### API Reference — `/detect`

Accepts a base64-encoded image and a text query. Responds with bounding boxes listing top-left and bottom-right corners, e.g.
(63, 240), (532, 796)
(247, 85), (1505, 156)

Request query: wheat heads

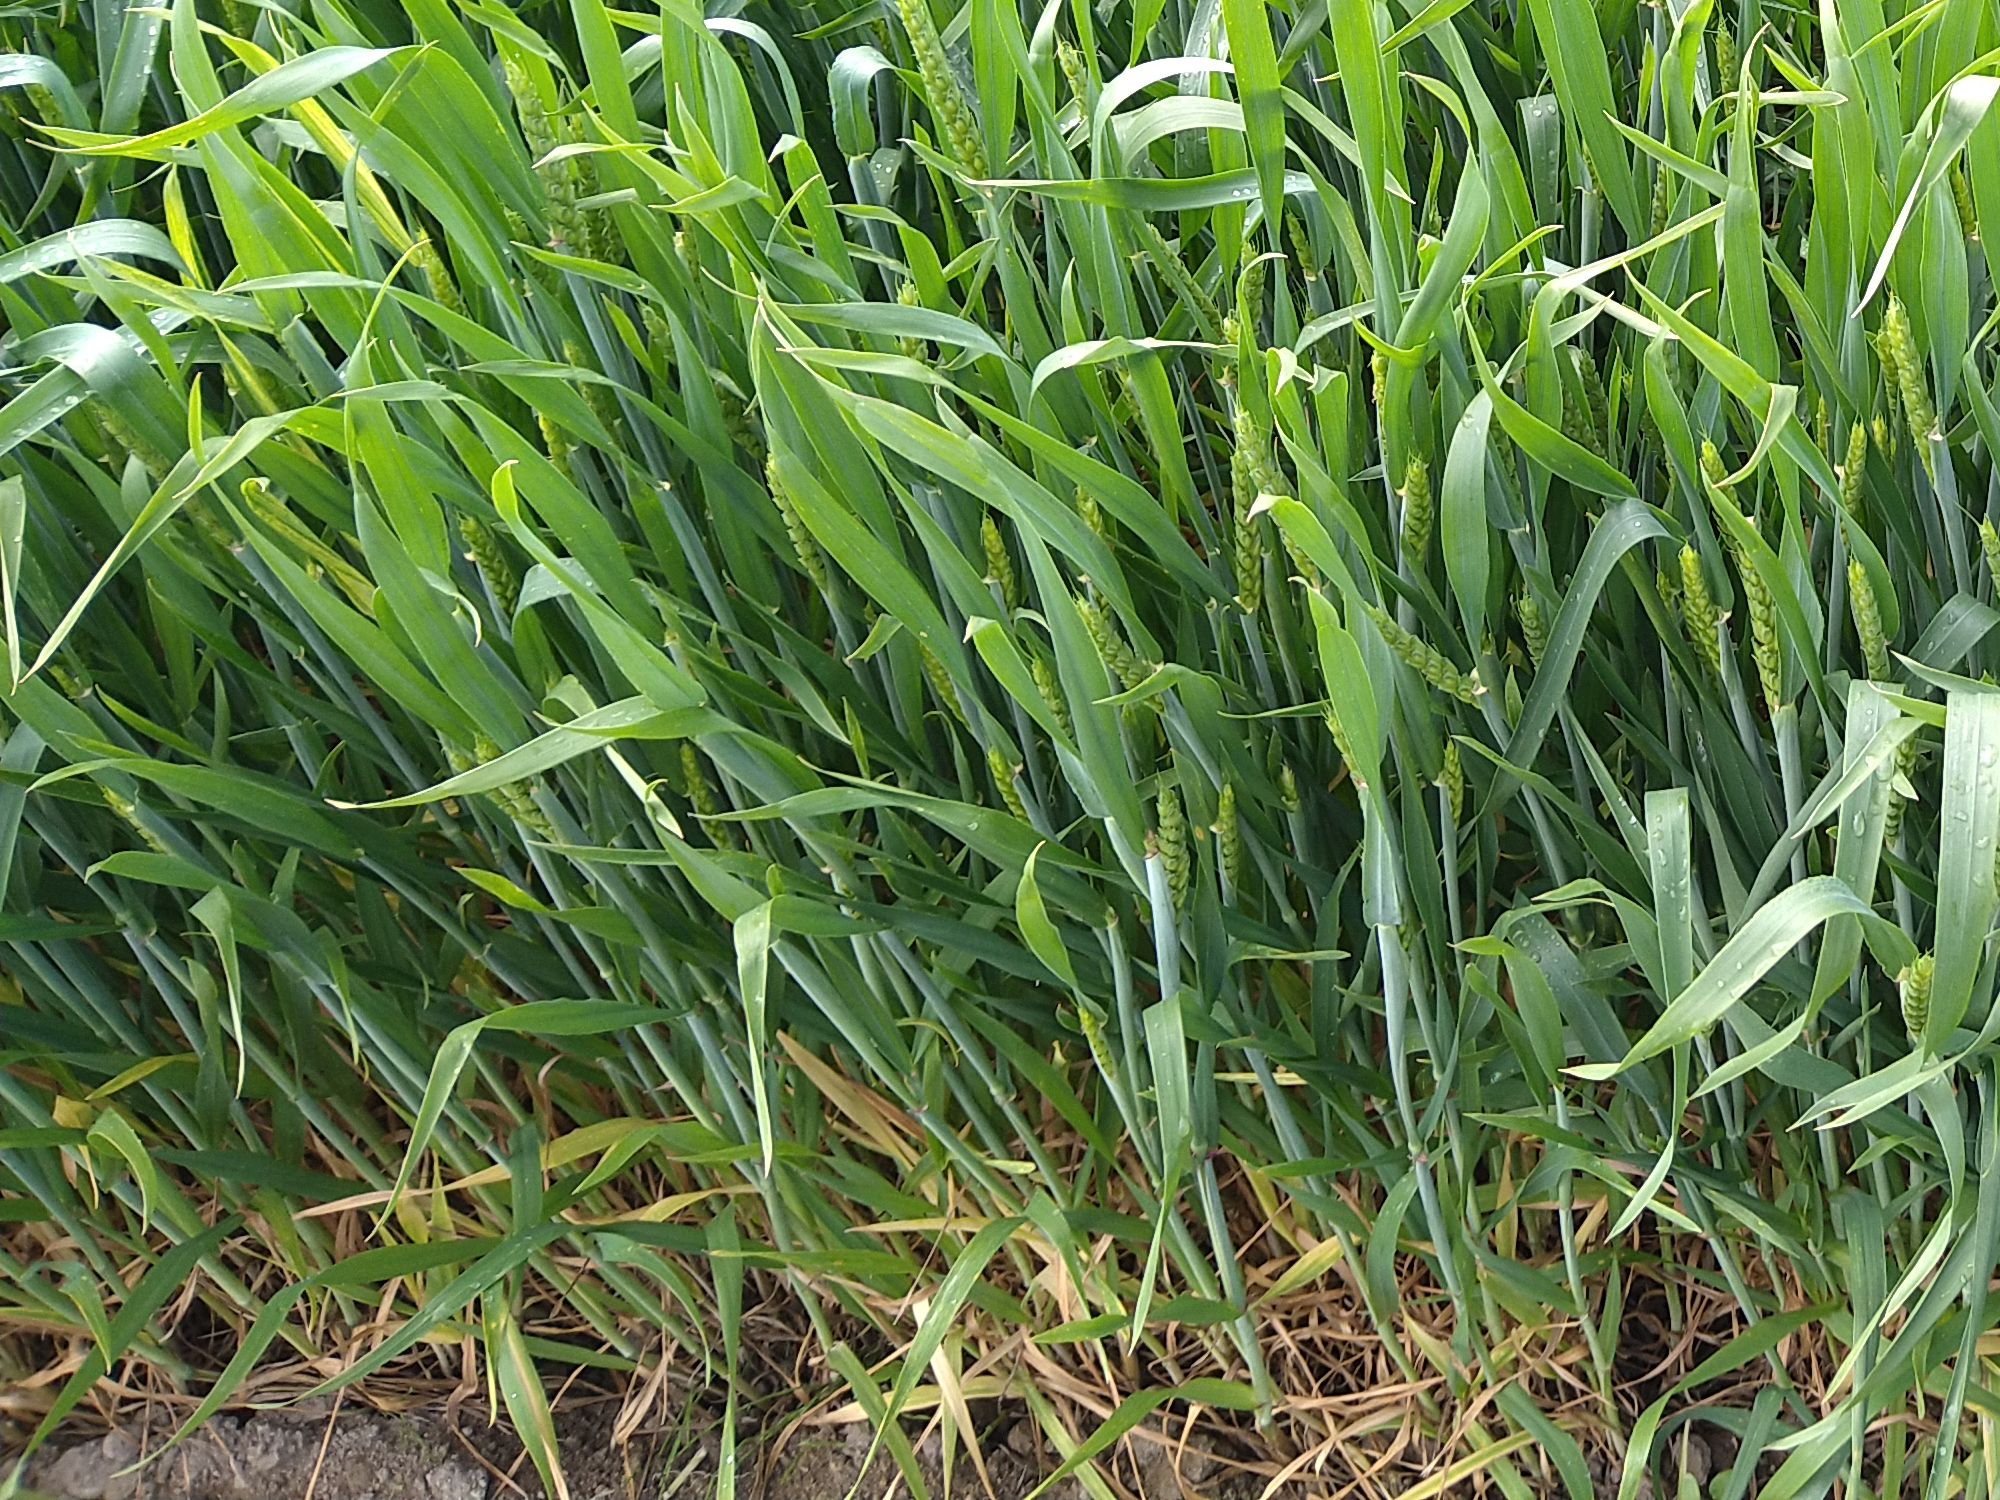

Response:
(1649, 149), (1670, 235)
(1586, 150), (1598, 194)
(988, 743), (1029, 823)
(22, 80), (70, 140)
(473, 732), (554, 842)
(1815, 398), (1828, 459)
(682, 745), (736, 852)
(766, 459), (822, 587)
(102, 788), (169, 855)
(1216, 779), (1239, 891)
(1368, 605), (1476, 708)
(1878, 333), (1898, 426)
(1321, 703), (1357, 812)
(895, 282), (925, 361)
(1490, 402), (1524, 514)
(1232, 396), (1296, 499)
(1083, 574), (1116, 627)
(708, 373), (773, 462)
(1839, 423), (1867, 538)
(221, 0), (246, 39)
(1519, 593), (1547, 667)
(582, 177), (627, 263)
(1900, 950), (1934, 1029)
(1883, 297), (1934, 486)
(460, 517), (517, 622)
(1373, 356), (1385, 456)
(1715, 24), (1743, 131)
(1233, 451), (1261, 614)
(1113, 358), (1144, 441)
(1654, 564), (1672, 626)
(1883, 737), (1913, 832)
(1399, 456), (1428, 571)
(1288, 210), (1315, 274)
(1153, 775), (1189, 901)
(1977, 520), (2000, 676)
(505, 210), (548, 283)
(672, 227), (699, 283)
(1873, 417), (1885, 457)
(1147, 221), (1221, 332)
(1280, 764), (1293, 799)
(1076, 598), (1161, 705)
(1035, 655), (1077, 750)
(1581, 352), (1609, 439)
(638, 301), (679, 366)
(1276, 518), (1323, 583)
(980, 517), (1019, 609)
(1660, 341), (1685, 405)
(921, 636), (964, 721)
(1229, 240), (1265, 349)
(1848, 558), (1889, 684)
(1623, 370), (1664, 459)
(1739, 536), (1780, 715)
(89, 401), (241, 549)
(1082, 1009), (1119, 1078)
(1682, 545), (1719, 663)
(1076, 486), (1104, 535)
(1055, 42), (1093, 121)
(1442, 744), (1465, 822)
(442, 743), (517, 816)
(417, 227), (478, 362)
(1703, 441), (1745, 553)
(504, 55), (590, 261)
(895, 0), (988, 185)
(731, 25), (762, 92)
(565, 336), (620, 451)
(1551, 395), (1599, 453)
(536, 409), (566, 471)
